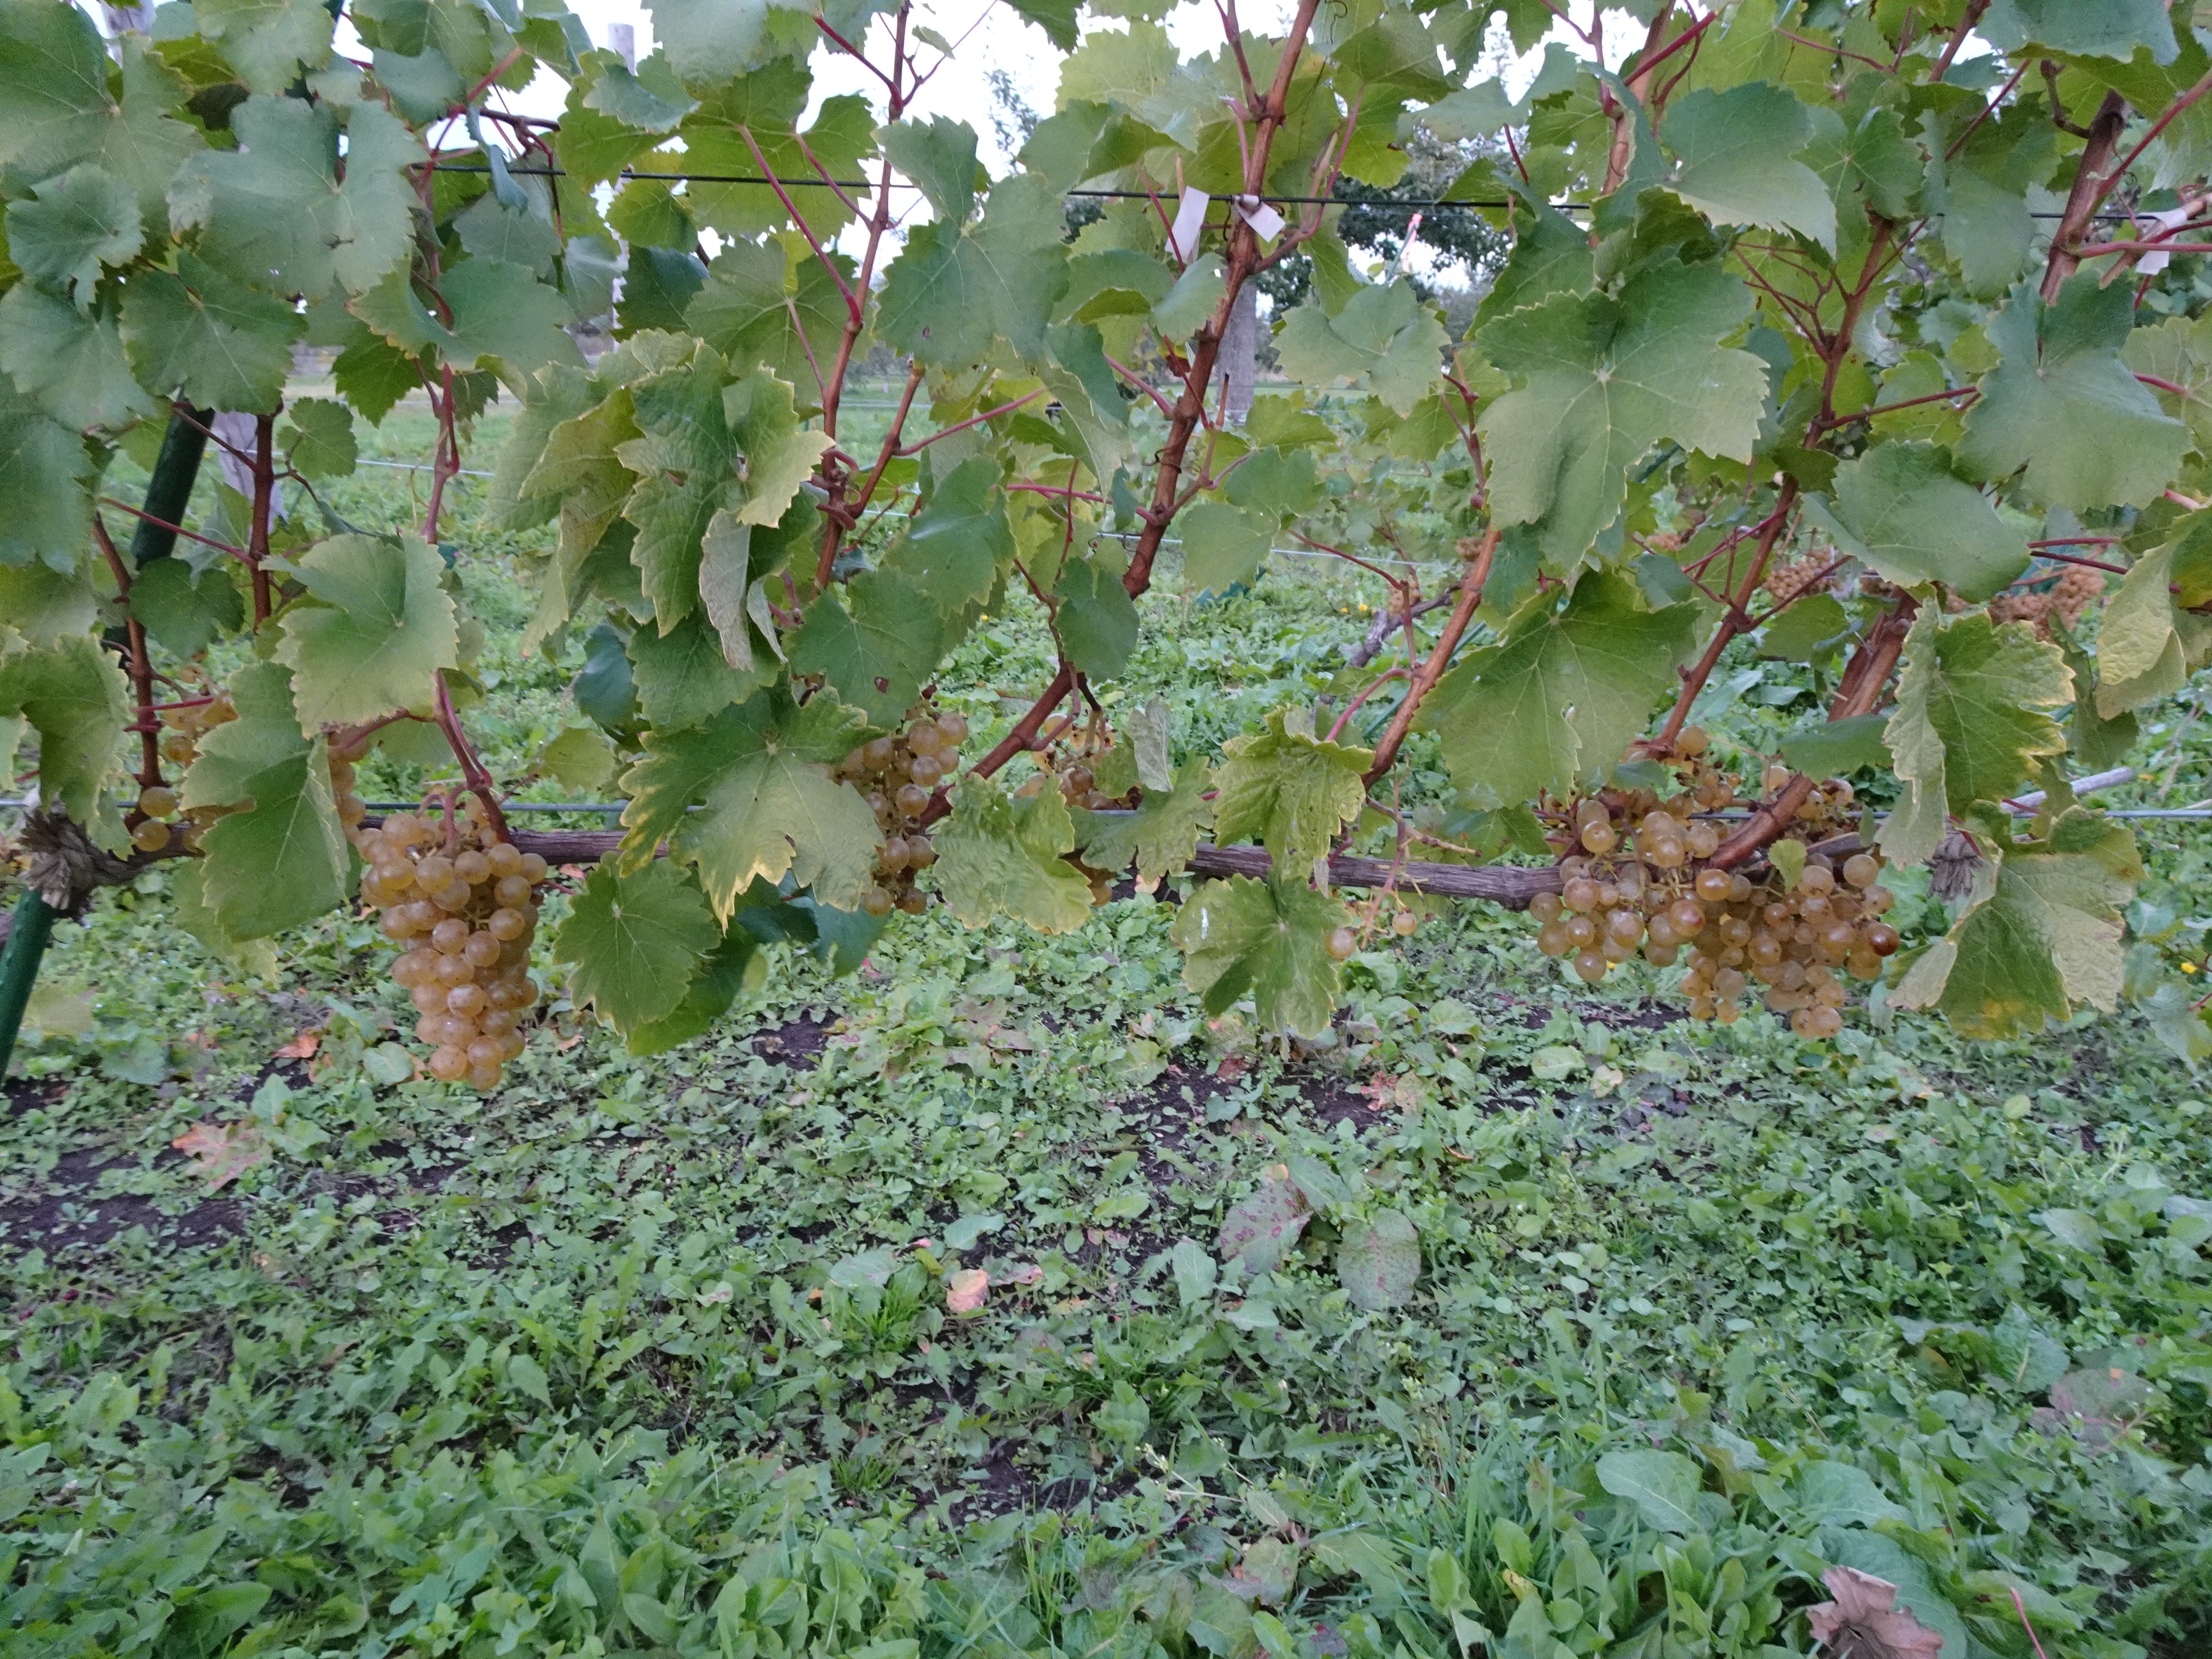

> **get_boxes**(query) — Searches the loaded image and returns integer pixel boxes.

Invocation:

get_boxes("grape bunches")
[1453,529,1496,564]
[863,785,933,920]
[839,709,969,787]
[1530,796,1752,984]
[1751,901,1851,1041]
[1033,714,1132,806]
[1326,909,1419,962]
[1995,591,2053,641]
[354,781,547,1093]
[1767,851,1908,978]
[321,720,377,830]
[1665,726,1748,811]
[1757,760,1865,833]
[1678,905,1753,1026]
[159,661,226,770]
[1382,571,1424,619]
[1761,546,1846,609]
[131,783,232,853]
[1639,503,1715,561]
[1073,856,1123,911]
[2053,563,2109,633]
